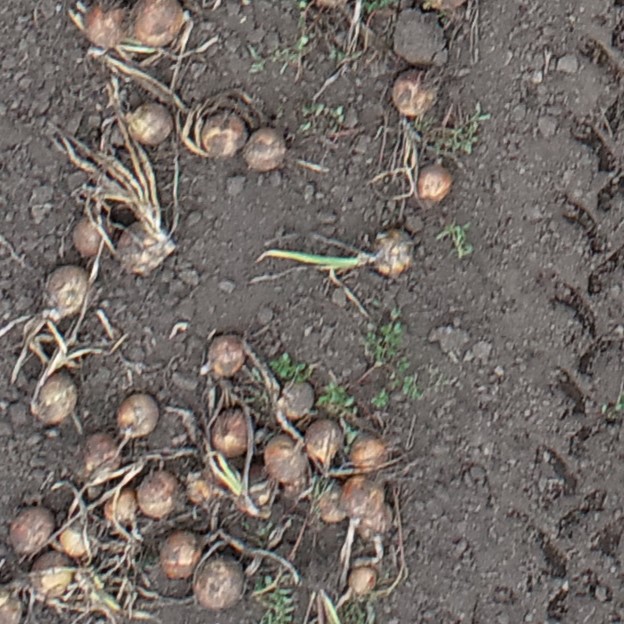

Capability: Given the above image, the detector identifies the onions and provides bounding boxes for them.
[261,437,307,485]
[126,103,169,143]
[209,411,249,454]
[390,70,437,118]
[345,433,385,471]
[208,335,244,379]
[345,565,377,593]
[187,473,218,504]
[41,267,89,315]
[137,473,178,518]
[84,4,126,47]
[107,487,138,520]
[413,164,451,204]
[359,504,391,537]
[31,367,77,421]
[319,489,349,522]
[186,109,244,158]
[159,529,203,577]
[57,528,89,558]
[275,380,314,419]
[69,219,107,258]
[370,227,412,275]
[302,419,344,464]
[115,220,175,272]
[341,476,383,519]
[32,559,75,598]
[242,126,283,171]
[114,395,158,436]
[0,590,22,624]
[134,1,183,47]
[9,506,54,553]
[192,555,243,610]
[77,431,114,475]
